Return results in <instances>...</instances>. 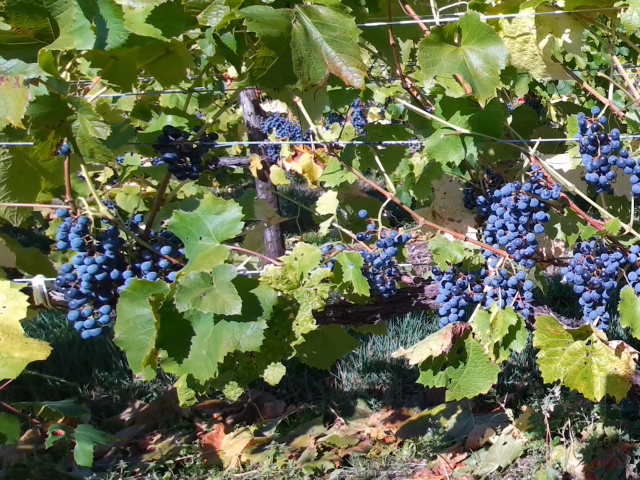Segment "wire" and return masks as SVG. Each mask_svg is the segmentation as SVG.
<instances>
[{
    "mask_svg": "<svg viewBox=\"0 0 640 480\" xmlns=\"http://www.w3.org/2000/svg\"><path fill=\"white\" fill-rule=\"evenodd\" d=\"M172 145H184V146H193V145H217V146H251V147H259V146H274V145H289V146H329V145H350V146H359L361 145H406V146H417L422 145V140H395V139H385V140H327V141H291V140H272V141H220V140H201L195 139L191 141L186 140H172Z\"/></svg>",
    "mask_w": 640,
    "mask_h": 480,
    "instance_id": "d2f4af69",
    "label": "wire"
},
{
    "mask_svg": "<svg viewBox=\"0 0 640 480\" xmlns=\"http://www.w3.org/2000/svg\"><path fill=\"white\" fill-rule=\"evenodd\" d=\"M620 6H601V7H581L577 9H561V10H545V11H524V12H516V13H497V14H488L481 15V20H491V19H499V18H518V17H526V16H556L563 14H579L583 12H604V11H620Z\"/></svg>",
    "mask_w": 640,
    "mask_h": 480,
    "instance_id": "a73af890",
    "label": "wire"
},
{
    "mask_svg": "<svg viewBox=\"0 0 640 480\" xmlns=\"http://www.w3.org/2000/svg\"><path fill=\"white\" fill-rule=\"evenodd\" d=\"M459 20L458 16H453L450 18H434V19H410V20H400V19H391L385 21H378L374 23H356V28H376L380 26L387 25H412V24H436V23H453Z\"/></svg>",
    "mask_w": 640,
    "mask_h": 480,
    "instance_id": "4f2155b8",
    "label": "wire"
},
{
    "mask_svg": "<svg viewBox=\"0 0 640 480\" xmlns=\"http://www.w3.org/2000/svg\"><path fill=\"white\" fill-rule=\"evenodd\" d=\"M573 137H560V138H513V139H494V144H515V143H536V144H545V143H562V142H573Z\"/></svg>",
    "mask_w": 640,
    "mask_h": 480,
    "instance_id": "f0478fcc",
    "label": "wire"
}]
</instances>
